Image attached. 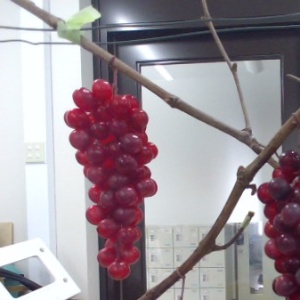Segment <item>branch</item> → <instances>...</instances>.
Wrapping results in <instances>:
<instances>
[{
	"mask_svg": "<svg viewBox=\"0 0 300 300\" xmlns=\"http://www.w3.org/2000/svg\"><path fill=\"white\" fill-rule=\"evenodd\" d=\"M202 9L204 11L205 17L208 19V25L215 37L217 45H219L220 51L224 59L227 61L230 71L234 77L235 89H238L239 101L241 103V108L245 118L246 128L242 130H237L235 128H230L229 126L218 122L215 118L209 116L204 111H200L197 107L187 103L179 96L171 94L166 90L159 87L156 83L151 82L146 76L139 73L137 70L133 69L129 64L123 62L121 59L110 54L106 49L100 47L98 44H94L86 37H82L81 47L89 53H94L99 58L103 59L108 65H113L116 69L123 72L124 74L132 77L136 82L140 83L146 89L152 91L157 97L161 98L171 109H177L186 113L188 116H192L208 125L219 129L224 133H228L232 137L241 141L248 147H250L255 153L259 154V157L252 161L248 166L238 167L236 171V182L234 188L228 198L227 203L224 205L217 220L213 223V227L204 237V239L199 243L196 250L190 255L182 264H180L172 274L165 278L161 283L145 294L137 297V300H156L158 297L165 294L169 289H171L181 278L187 275L191 270H193L199 263L200 259L206 256L212 251H221V249H227L231 246L234 241L242 234L243 229L232 236L227 244L222 246L216 245L215 240L219 233L222 231L224 225L228 222L231 214L236 206L239 198L241 197L244 190L247 188L252 189L251 196L256 195V184H251L256 173L262 169L265 164H269L272 168H275L277 162L272 156L279 147L283 145L286 138L292 134L296 126L300 123V109L296 110L295 113L285 122L278 134H276L270 142H268L265 147L262 146L256 138H253L252 127L249 126V118L247 110L244 106V101L242 98L241 85L237 77V63L230 62L229 55L224 48L223 43L219 40L216 31L213 28V23L211 20V14L209 12V7L207 2L201 1Z\"/></svg>",
	"mask_w": 300,
	"mask_h": 300,
	"instance_id": "obj_1",
	"label": "branch"
},
{
	"mask_svg": "<svg viewBox=\"0 0 300 300\" xmlns=\"http://www.w3.org/2000/svg\"><path fill=\"white\" fill-rule=\"evenodd\" d=\"M12 2L19 6L21 9H25L26 11L30 12L40 20L49 23L53 30H57L58 20H63V17L54 16L46 9L40 8V6H38L31 0H12Z\"/></svg>",
	"mask_w": 300,
	"mask_h": 300,
	"instance_id": "obj_2",
	"label": "branch"
}]
</instances>
